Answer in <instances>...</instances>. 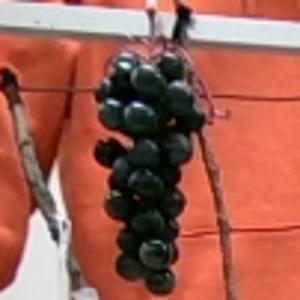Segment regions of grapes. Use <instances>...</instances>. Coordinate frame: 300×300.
<instances>
[{"mask_svg":"<svg viewBox=\"0 0 300 300\" xmlns=\"http://www.w3.org/2000/svg\"><path fill=\"white\" fill-rule=\"evenodd\" d=\"M111 68L91 87L102 106L96 121L129 141L123 145L115 136H103L91 156L110 171L102 210L122 223L115 238L122 253L113 271L127 283L143 281L150 295L166 298L177 282L172 268L181 260L183 236L178 220L188 206L178 188L181 167L192 160V136L206 125L208 114L188 86L189 68L180 53L164 51L147 66L139 64L134 51L120 48Z\"/></svg>","mask_w":300,"mask_h":300,"instance_id":"01657485","label":"grapes"}]
</instances>
